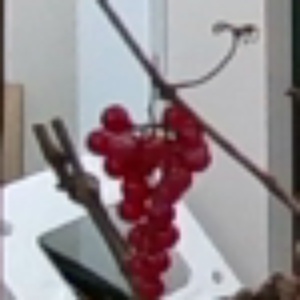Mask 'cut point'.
<instances>
[{"instance_id": "obj_1", "label": "cut point", "mask_w": 300, "mask_h": 300, "mask_svg": "<svg viewBox=\"0 0 300 300\" xmlns=\"http://www.w3.org/2000/svg\"><path fill=\"white\" fill-rule=\"evenodd\" d=\"M160 95H161V90L159 88H156V86H153L152 95H151L150 99L148 100V113H149L150 123H153L151 103L154 100V97L156 98V100H160Z\"/></svg>"}]
</instances>
